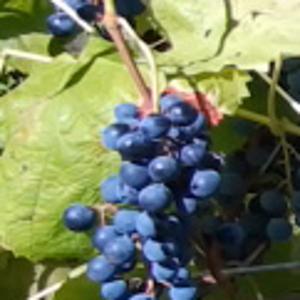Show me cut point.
Here are the masks:
<instances>
[{
	"label": "cut point",
	"instance_id": "obj_1",
	"mask_svg": "<svg viewBox=\"0 0 300 300\" xmlns=\"http://www.w3.org/2000/svg\"><path fill=\"white\" fill-rule=\"evenodd\" d=\"M114 22L117 25H123L126 31L132 36L135 43L143 50L145 55L148 57L149 64L152 71V109L158 111L160 109L159 105V69L156 61L155 54L152 52L150 47L141 39L139 33L130 22L124 17H116Z\"/></svg>",
	"mask_w": 300,
	"mask_h": 300
}]
</instances>
